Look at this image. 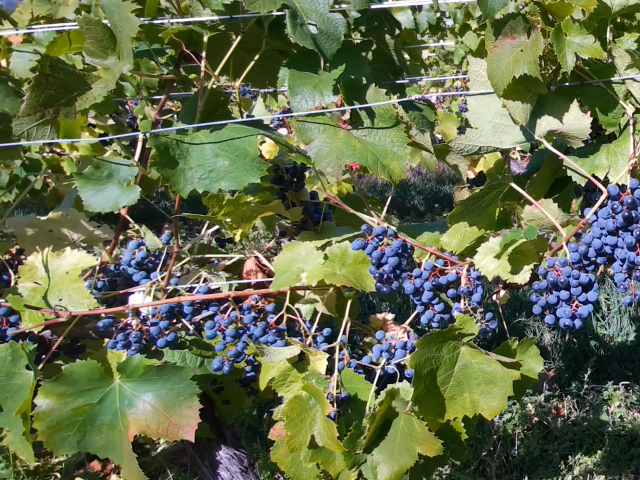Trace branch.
Wrapping results in <instances>:
<instances>
[{"label": "branch", "instance_id": "325d2c04", "mask_svg": "<svg viewBox=\"0 0 640 480\" xmlns=\"http://www.w3.org/2000/svg\"><path fill=\"white\" fill-rule=\"evenodd\" d=\"M354 190L356 192V194L358 195V197L360 198V200L364 203V205L366 206V209L368 210V212L382 225L385 226V228L387 229H393L396 233V237L406 241L407 243H411L414 246L424 249L425 251L431 250L433 254L441 257L442 259H444L445 261L457 265L459 267H465L466 263L459 261L457 259H454L452 257L447 256L444 252L437 250L436 248H432L429 247L428 245L418 242L417 240L410 238L406 235H403V233L395 226L387 223L376 211H374V209L371 207V203L366 199V197L364 196V194L361 192V189L358 185L354 186Z\"/></svg>", "mask_w": 640, "mask_h": 480}, {"label": "branch", "instance_id": "1af6ec82", "mask_svg": "<svg viewBox=\"0 0 640 480\" xmlns=\"http://www.w3.org/2000/svg\"><path fill=\"white\" fill-rule=\"evenodd\" d=\"M185 53H186L185 49H181L180 50V53L178 54V57H177V60H176L175 66H174L175 70H178L180 68V65H181V62H182V59H183Z\"/></svg>", "mask_w": 640, "mask_h": 480}, {"label": "branch", "instance_id": "1d269e1b", "mask_svg": "<svg viewBox=\"0 0 640 480\" xmlns=\"http://www.w3.org/2000/svg\"><path fill=\"white\" fill-rule=\"evenodd\" d=\"M640 164V158H637L636 160H634L632 163H630L629 165H627L626 167H624L617 176H615L612 180L613 184H617L619 180H621L623 178V176L625 175V173H627L628 171H630L631 169H633L634 167H636L637 165Z\"/></svg>", "mask_w": 640, "mask_h": 480}, {"label": "branch", "instance_id": "45aa463d", "mask_svg": "<svg viewBox=\"0 0 640 480\" xmlns=\"http://www.w3.org/2000/svg\"><path fill=\"white\" fill-rule=\"evenodd\" d=\"M607 198V194L603 193L599 199L593 204L591 211L588 213L587 217H583L582 221L578 224V226L576 228H574L572 231H570L563 239L562 241L556 245L554 248H552L550 251L547 252V256L551 257L553 256L557 251H559L560 249H562V243L563 242H568L575 234L578 233L579 229H582L584 227V225L588 222L589 217L591 215H594V213L596 212L597 208L599 207L600 204L603 203V201Z\"/></svg>", "mask_w": 640, "mask_h": 480}, {"label": "branch", "instance_id": "170604dd", "mask_svg": "<svg viewBox=\"0 0 640 480\" xmlns=\"http://www.w3.org/2000/svg\"><path fill=\"white\" fill-rule=\"evenodd\" d=\"M258 21L257 17H253L249 22H247L242 28L241 30L238 32V34L235 36V38L232 40V42L230 43V45L228 46L225 55L223 56L222 60L220 61L219 65L216 67L212 78L210 79V82L208 83V85L205 88V93L203 94L202 97V101L198 107L196 116L194 118V122L198 123L201 119L203 110L205 108V105L207 103L208 97L210 95V91L213 88L219 73L221 72V70L223 69V67L225 66L227 60L229 59L233 48L236 46V44L238 43V41L242 38V36L246 33V31L252 27L256 22Z\"/></svg>", "mask_w": 640, "mask_h": 480}, {"label": "branch", "instance_id": "1ff4a987", "mask_svg": "<svg viewBox=\"0 0 640 480\" xmlns=\"http://www.w3.org/2000/svg\"><path fill=\"white\" fill-rule=\"evenodd\" d=\"M330 286H333L334 290L336 289V286L334 284L320 285V286H293V287L277 289L276 293L277 294H284V293L289 294V293H292V292H299V291H323V290H326Z\"/></svg>", "mask_w": 640, "mask_h": 480}, {"label": "branch", "instance_id": "30e6481e", "mask_svg": "<svg viewBox=\"0 0 640 480\" xmlns=\"http://www.w3.org/2000/svg\"><path fill=\"white\" fill-rule=\"evenodd\" d=\"M173 226H174L175 242H174V247L172 251V259L169 261L168 267L161 281L163 283V286L161 287V290H160V299H161L160 301L147 302V303H130L120 307H107L102 309L86 310L82 312L60 311L57 309H51L43 306H36V305H30V304H25L24 308L28 310L41 311L44 313L54 314L58 316L85 317L89 315H99V314H105L110 312H123L133 308H149V307L163 306V305L170 304L177 301L212 300V299H218V298L244 297V296L267 294L272 292L271 288H265V289L250 290V291L246 290V291H234V292H227V293H207L203 295L175 296V297L165 299L166 284L170 277V273L173 270L174 263L177 260V254H178L179 245H180L179 223H178L177 217L173 218Z\"/></svg>", "mask_w": 640, "mask_h": 480}, {"label": "branch", "instance_id": "ea751061", "mask_svg": "<svg viewBox=\"0 0 640 480\" xmlns=\"http://www.w3.org/2000/svg\"><path fill=\"white\" fill-rule=\"evenodd\" d=\"M174 83H175L174 79H171L168 82V85H167V88H166V90L164 92V95L162 96V98H161V100L159 102V105L156 108V111L154 112V120H153V123H152L153 127H157L158 126L159 115H160L161 111L163 110V107H164V105H165V103H166V101H167V99H168V97L170 95V92L172 90V87H173Z\"/></svg>", "mask_w": 640, "mask_h": 480}, {"label": "branch", "instance_id": "982ccf7c", "mask_svg": "<svg viewBox=\"0 0 640 480\" xmlns=\"http://www.w3.org/2000/svg\"><path fill=\"white\" fill-rule=\"evenodd\" d=\"M127 213H128V208L127 207L121 208L120 211H119V214L121 215L120 216V223H119V226H118V228H117V230L115 232V235H114V238L112 240V243H111L109 249L107 250V253L103 256L104 260H108L112 256V253H113L114 249L116 248V245H117V243L119 241V237H120V235H121V233L123 231L124 225H125L124 215L127 214Z\"/></svg>", "mask_w": 640, "mask_h": 480}, {"label": "branch", "instance_id": "ca6c30ca", "mask_svg": "<svg viewBox=\"0 0 640 480\" xmlns=\"http://www.w3.org/2000/svg\"><path fill=\"white\" fill-rule=\"evenodd\" d=\"M152 153V149L148 148V138L144 137L143 138V149L142 152L140 153V156L138 158L139 162H142V167L143 168H147L148 167V159L151 156Z\"/></svg>", "mask_w": 640, "mask_h": 480}]
</instances>
